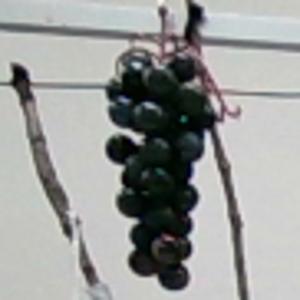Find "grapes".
<instances>
[{
  "mask_svg": "<svg viewBox=\"0 0 300 300\" xmlns=\"http://www.w3.org/2000/svg\"><path fill=\"white\" fill-rule=\"evenodd\" d=\"M206 64L196 54L180 52L164 68L133 67L106 81L112 125L143 135L142 144L116 132L106 137L107 159L121 169L114 203L134 224L127 239L134 248L127 263L137 276L169 292L187 288L190 273L181 262L190 258L195 230L192 211L201 195L191 181L194 164L206 154L204 132L215 128L219 114L208 90L191 86Z\"/></svg>",
  "mask_w": 300,
  "mask_h": 300,
  "instance_id": "obj_1",
  "label": "grapes"
}]
</instances>
